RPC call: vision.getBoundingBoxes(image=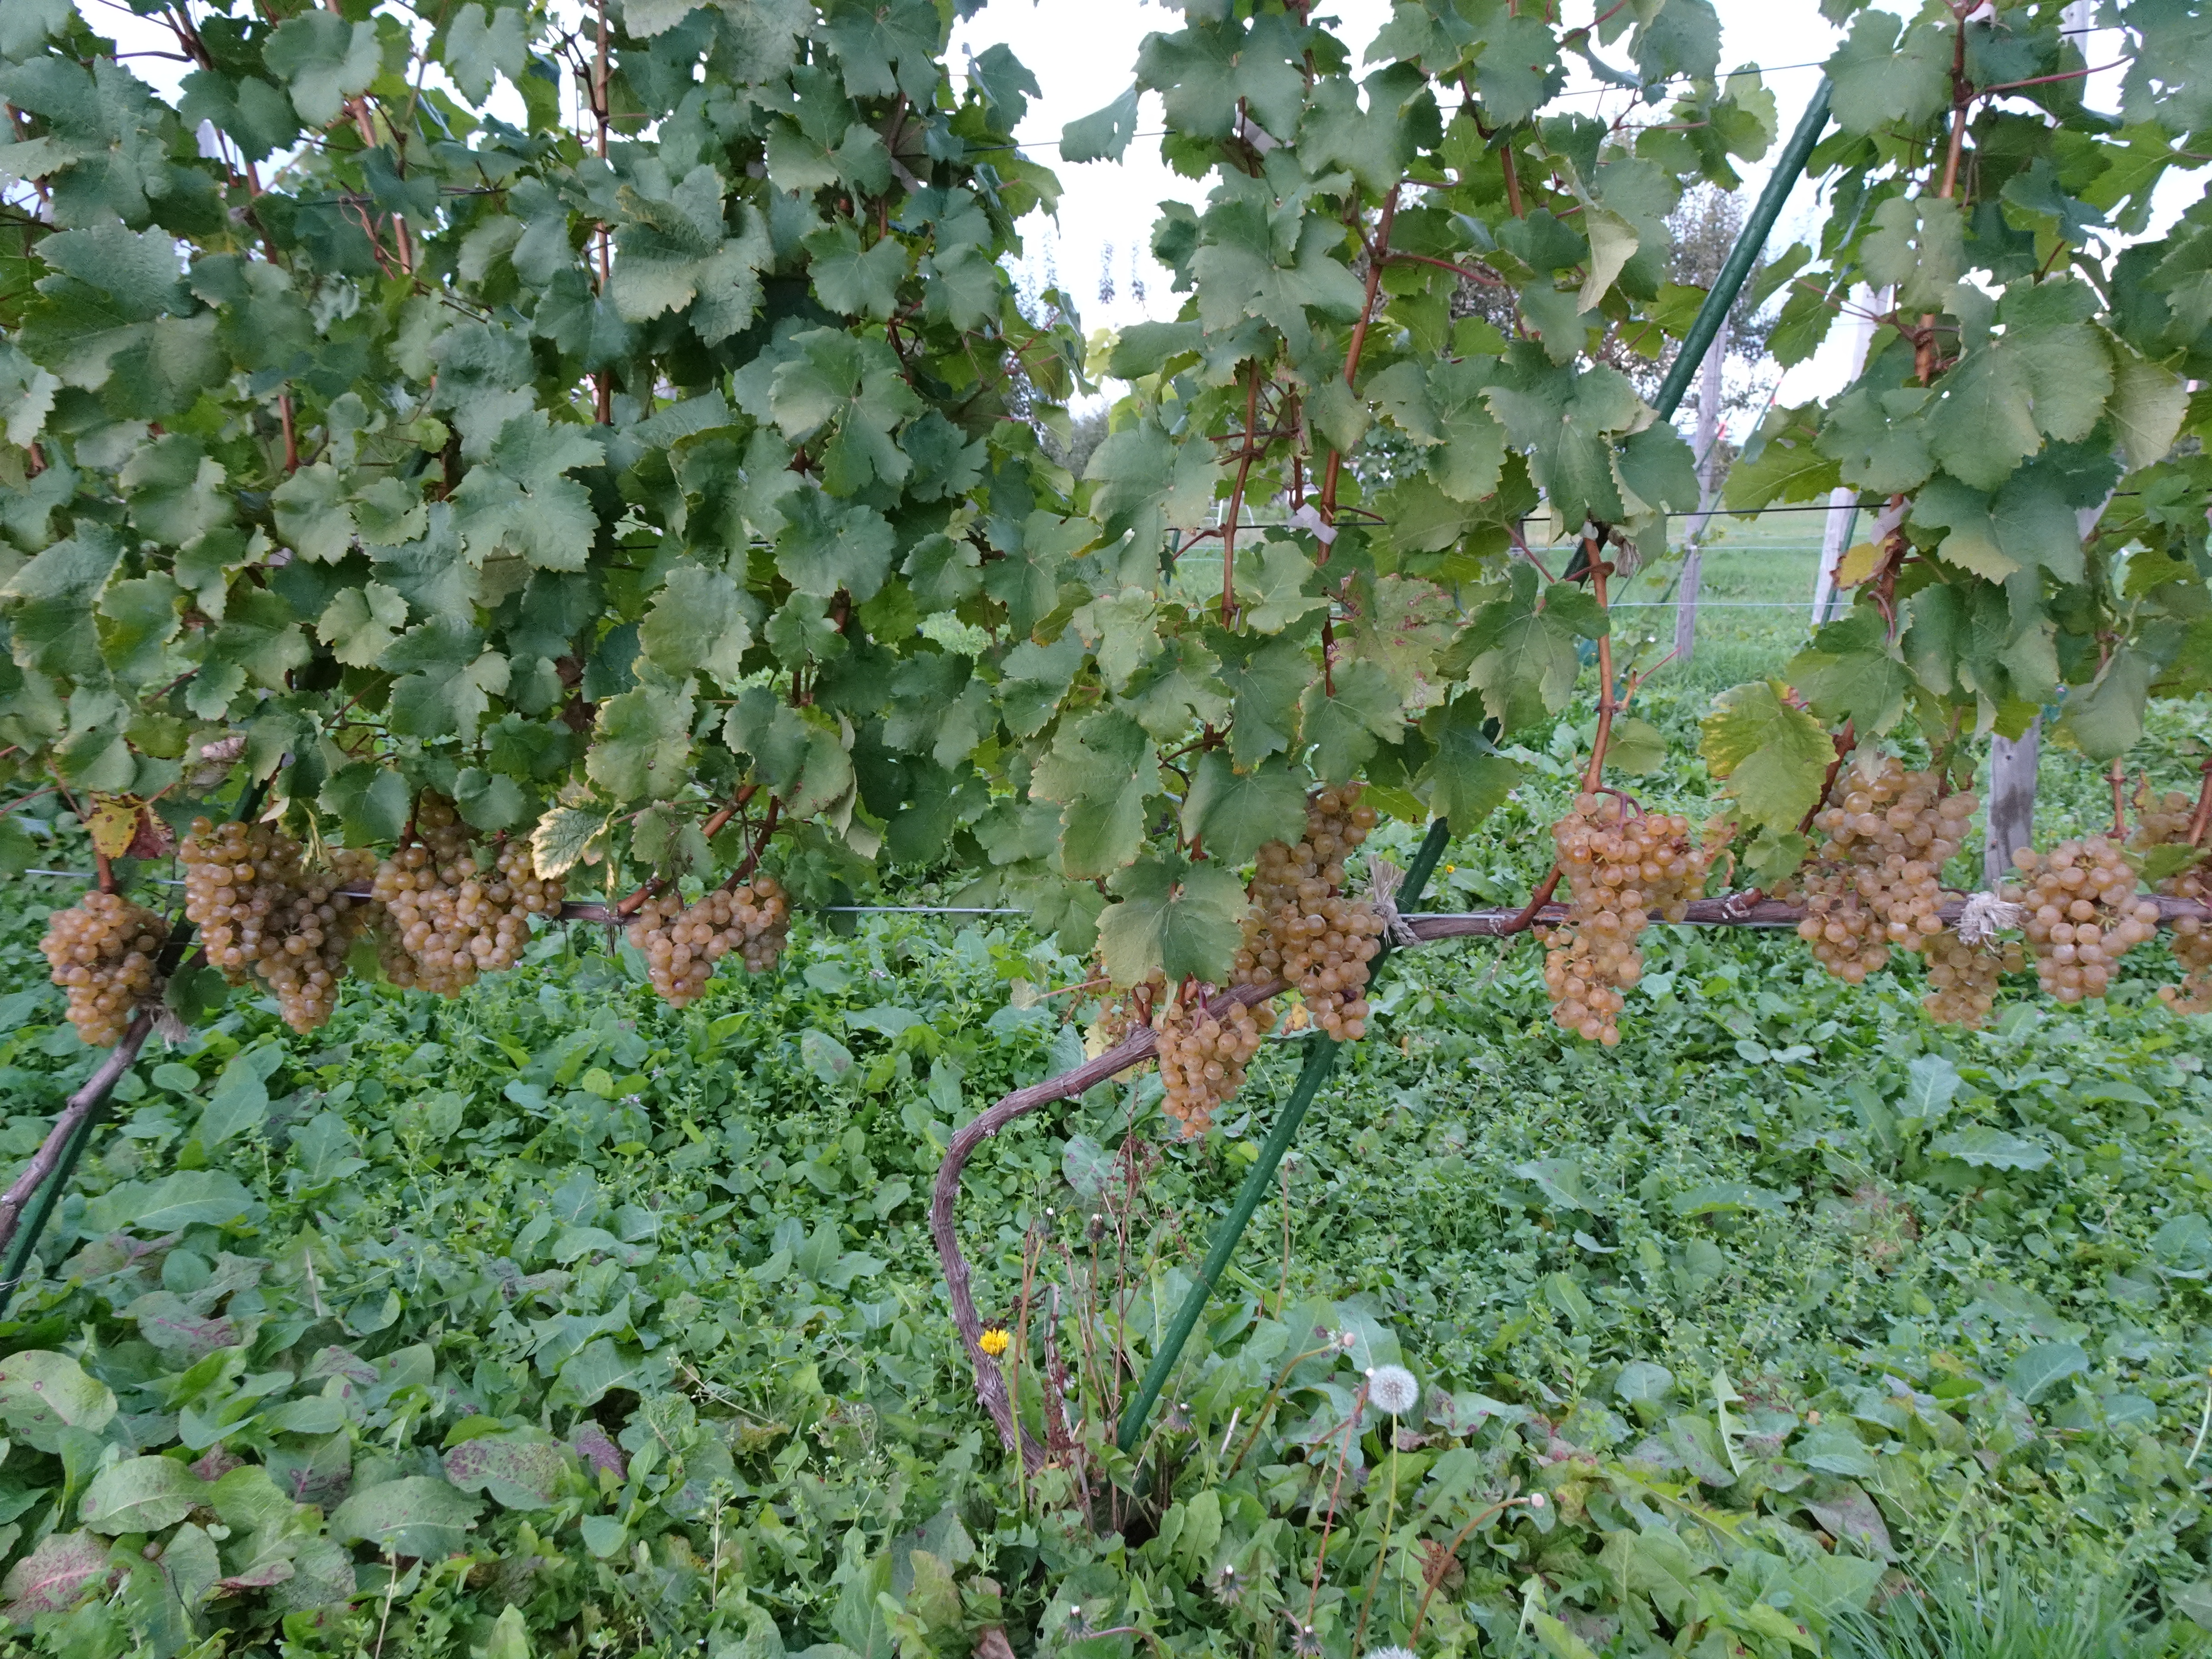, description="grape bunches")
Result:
[490,839,567,920]
[1549,792,1709,949]
[456,883,534,972]
[1152,998,1278,1138]
[417,786,481,866]
[725,874,791,973]
[1255,839,1331,922]
[1918,926,2024,1029]
[1533,922,1642,1047]
[1305,780,1378,885]
[1280,898,1385,1043]
[1995,836,2159,1002]
[363,897,419,988]
[254,872,352,1036]
[326,844,381,935]
[39,888,171,1048]
[626,888,731,1009]
[1770,836,1891,985]
[2156,959,2211,1017]
[372,843,481,999]
[1085,952,1165,1037]
[1232,907,1287,987]
[178,816,301,986]
[2126,790,2212,965]
[1813,756,1979,942]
